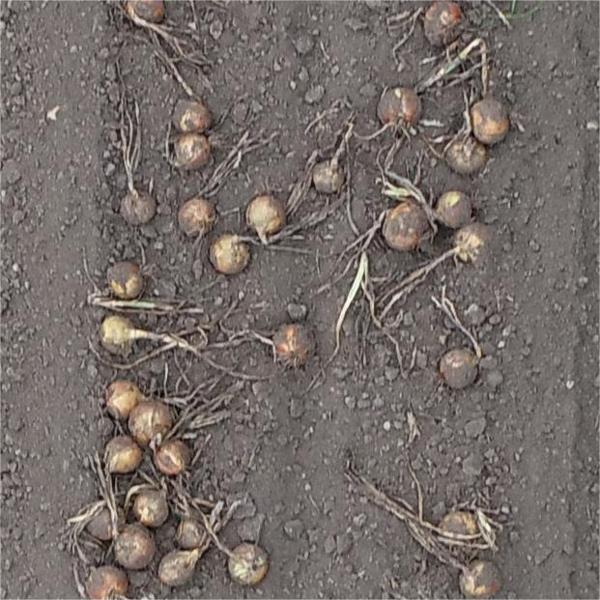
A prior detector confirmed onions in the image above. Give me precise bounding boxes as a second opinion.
[112,526,155,569]
[438,347,477,388]
[209,233,250,272]
[382,199,430,247]
[84,504,127,538]
[468,98,508,142]
[119,190,155,223]
[126,0,167,26]
[101,316,134,352]
[169,132,208,168]
[103,436,141,473]
[227,543,268,584]
[176,196,215,235]
[435,187,470,225]
[451,225,486,261]
[272,324,313,364]
[174,518,205,546]
[244,195,283,235]
[445,135,485,173]
[439,510,483,545]
[128,486,167,525]
[104,379,144,416]
[83,566,126,600]
[377,86,419,126]
[107,258,142,296]
[424,3,465,48]
[311,160,344,192]
[152,438,189,472]
[457,558,500,595]
[177,101,208,130]
[128,401,172,442]
[158,547,199,585]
